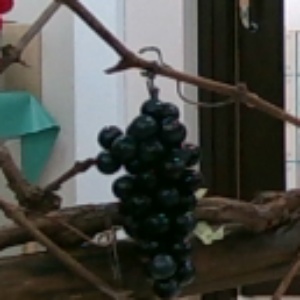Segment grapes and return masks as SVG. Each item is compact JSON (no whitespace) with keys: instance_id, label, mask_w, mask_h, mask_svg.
Wrapping results in <instances>:
<instances>
[{"instance_id":"01657485","label":"grapes","mask_w":300,"mask_h":300,"mask_svg":"<svg viewBox=\"0 0 300 300\" xmlns=\"http://www.w3.org/2000/svg\"><path fill=\"white\" fill-rule=\"evenodd\" d=\"M179 116L175 103L151 98L140 105L125 136L116 125L97 135L102 147L95 157L97 169L114 174L124 165L127 172L114 181L112 192L120 199L125 233L152 254L148 271L162 300L176 299L196 277L188 235L198 225L195 192L204 177L192 167L201 162L203 151L194 142L182 145L187 128Z\"/></svg>"}]
</instances>
